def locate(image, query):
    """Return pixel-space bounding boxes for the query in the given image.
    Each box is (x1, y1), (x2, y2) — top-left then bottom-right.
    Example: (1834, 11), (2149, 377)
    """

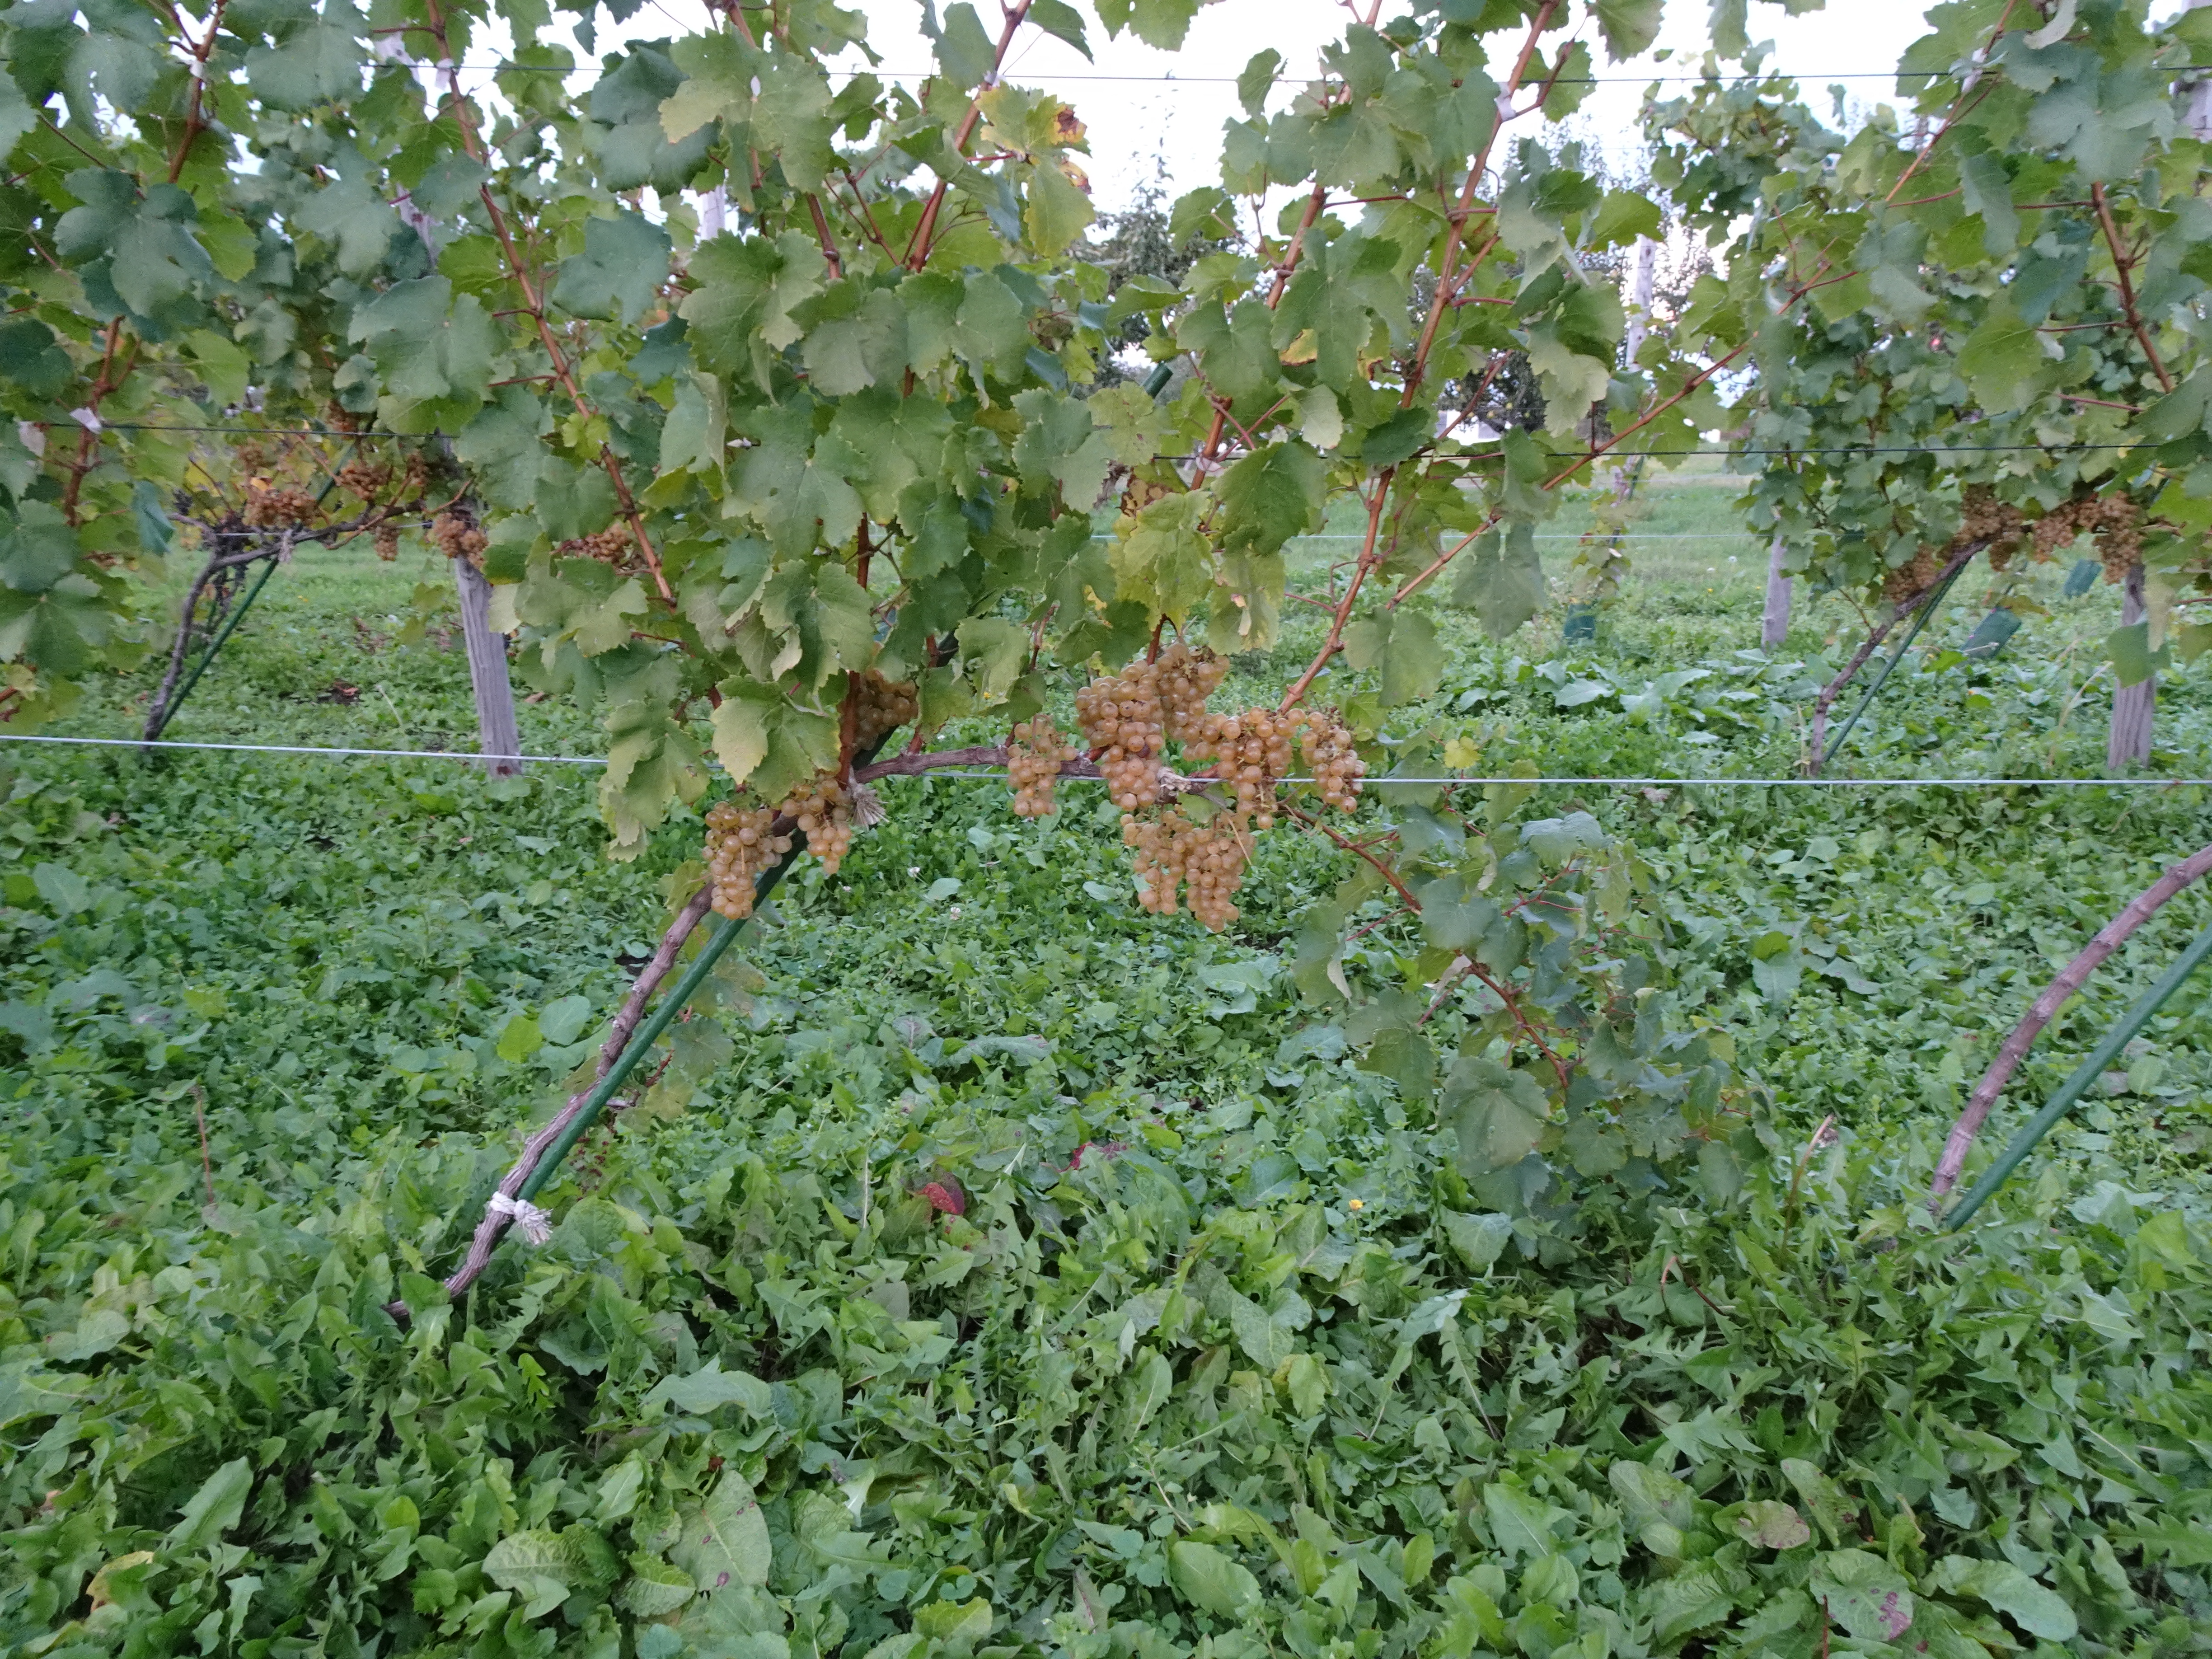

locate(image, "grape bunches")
(427, 507), (488, 566)
(235, 488), (328, 529)
(1148, 643), (1229, 762)
(836, 641), (918, 755)
(1181, 826), (1258, 934)
(700, 800), (792, 920)
(1074, 660), (1165, 812)
(769, 773), (852, 874)
(1006, 714), (1078, 817)
(1119, 801), (1196, 915)
(557, 524), (631, 568)
(2085, 492), (2148, 588)
(1202, 704), (1305, 827)
(1298, 712), (1370, 815)
(328, 456), (394, 487)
